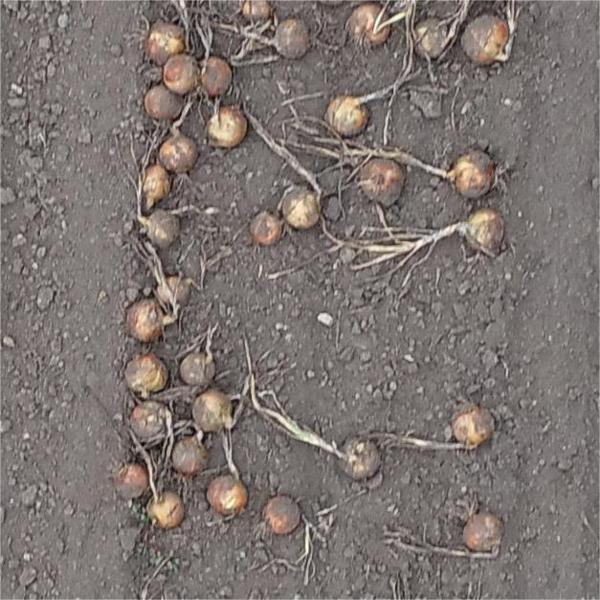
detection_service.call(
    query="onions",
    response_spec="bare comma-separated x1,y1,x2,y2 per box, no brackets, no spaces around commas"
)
461,14,509,61
111,463,147,496
263,495,300,536
192,390,234,430
125,354,166,393
273,17,308,57
359,159,400,203
206,477,246,514
326,94,367,136
243,2,273,24
144,85,182,120
462,511,502,550
156,275,192,308
342,437,378,478
465,208,504,251
146,491,183,527
201,57,233,95
143,212,179,246
207,106,246,147
130,402,169,440
180,348,215,384
170,436,204,472
157,134,195,171
126,301,162,340
413,17,453,56
450,404,492,445
249,212,283,245
147,22,186,63
138,167,172,201
163,55,195,91
349,6,390,45
449,149,492,196
279,187,318,228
